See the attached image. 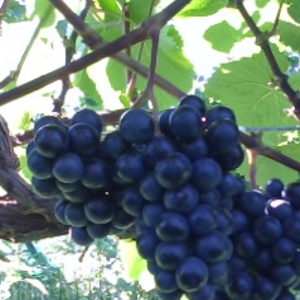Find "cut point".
<instances>
[{
	"instance_id": "obj_1",
	"label": "cut point",
	"mask_w": 300,
	"mask_h": 300,
	"mask_svg": "<svg viewBox=\"0 0 300 300\" xmlns=\"http://www.w3.org/2000/svg\"><path fill=\"white\" fill-rule=\"evenodd\" d=\"M159 35L160 31L158 29L150 32L151 36V59L149 61V69H148V77L146 81V86L142 94L138 96L137 99L132 103V107H140L147 99L153 105V119H154V134L156 136L160 135L159 130V110H158V102L156 101V96L154 94V85H155V72H156V64L158 58V47H159Z\"/></svg>"
},
{
	"instance_id": "obj_2",
	"label": "cut point",
	"mask_w": 300,
	"mask_h": 300,
	"mask_svg": "<svg viewBox=\"0 0 300 300\" xmlns=\"http://www.w3.org/2000/svg\"><path fill=\"white\" fill-rule=\"evenodd\" d=\"M246 156L248 159V172L250 176L251 187L254 190H260L261 185L257 182V168H256L257 153L251 149H247Z\"/></svg>"
}]
</instances>
